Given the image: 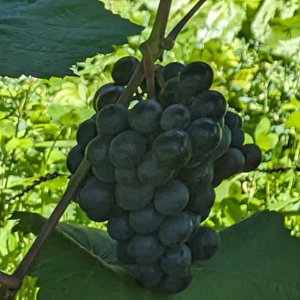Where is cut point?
<instances>
[{
  "instance_id": "obj_1",
  "label": "cut point",
  "mask_w": 300,
  "mask_h": 300,
  "mask_svg": "<svg viewBox=\"0 0 300 300\" xmlns=\"http://www.w3.org/2000/svg\"><path fill=\"white\" fill-rule=\"evenodd\" d=\"M139 50L142 53V61L144 62V72L146 75V97L154 98V57L152 56L148 41L143 42L139 46Z\"/></svg>"
}]
</instances>
